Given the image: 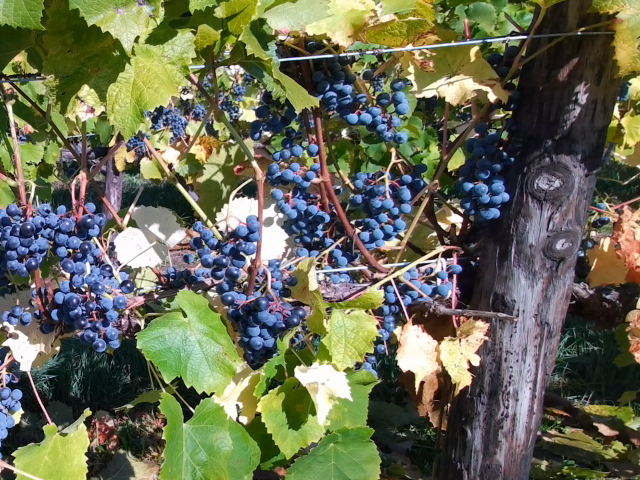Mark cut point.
<instances>
[{"instance_id": "obj_1", "label": "cut point", "mask_w": 640, "mask_h": 480, "mask_svg": "<svg viewBox=\"0 0 640 480\" xmlns=\"http://www.w3.org/2000/svg\"><path fill=\"white\" fill-rule=\"evenodd\" d=\"M256 179V177L254 175H251L249 178H247L246 180L242 181L241 183H239L234 190L232 191L229 200L227 201V209L231 210L232 209V203L235 200V197L237 195V193L244 188L245 186L249 185L250 183H252L254 180Z\"/></svg>"}, {"instance_id": "obj_2", "label": "cut point", "mask_w": 640, "mask_h": 480, "mask_svg": "<svg viewBox=\"0 0 640 480\" xmlns=\"http://www.w3.org/2000/svg\"><path fill=\"white\" fill-rule=\"evenodd\" d=\"M24 184H30L31 192L28 195V202L32 203L33 202V198L36 195V184H35V181L33 179H24Z\"/></svg>"}, {"instance_id": "obj_3", "label": "cut point", "mask_w": 640, "mask_h": 480, "mask_svg": "<svg viewBox=\"0 0 640 480\" xmlns=\"http://www.w3.org/2000/svg\"><path fill=\"white\" fill-rule=\"evenodd\" d=\"M260 269L267 274V276H268L267 277V285L271 286L272 285V280H273L272 271L268 267H266L263 263H261Z\"/></svg>"}, {"instance_id": "obj_4", "label": "cut point", "mask_w": 640, "mask_h": 480, "mask_svg": "<svg viewBox=\"0 0 640 480\" xmlns=\"http://www.w3.org/2000/svg\"><path fill=\"white\" fill-rule=\"evenodd\" d=\"M394 164H395V160H394V158L392 157V154H391V159L389 161V166L384 171V175L385 176H388L389 173L393 170Z\"/></svg>"}]
</instances>
